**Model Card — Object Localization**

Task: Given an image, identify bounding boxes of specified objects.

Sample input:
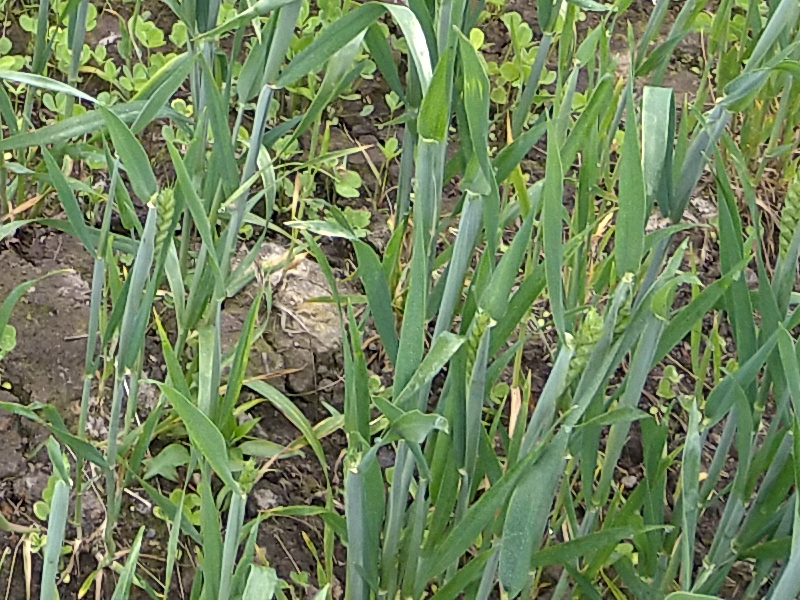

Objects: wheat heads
[779,167,800,258]
[465,308,487,377]
[152,190,177,258]
[560,312,603,398]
